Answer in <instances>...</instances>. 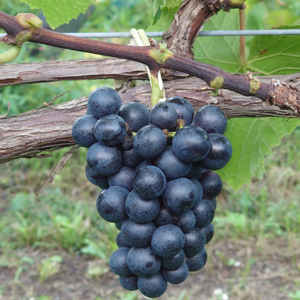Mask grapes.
<instances>
[{
    "instance_id": "obj_1",
    "label": "grapes",
    "mask_w": 300,
    "mask_h": 300,
    "mask_svg": "<svg viewBox=\"0 0 300 300\" xmlns=\"http://www.w3.org/2000/svg\"><path fill=\"white\" fill-rule=\"evenodd\" d=\"M226 128L220 107L195 113L182 96L148 111L138 102L122 106L109 86L89 94L71 136L88 148L86 177L102 189L98 213L120 230L109 265L126 290L157 298L207 264L204 247L223 189L213 171L232 156Z\"/></svg>"
}]
</instances>
